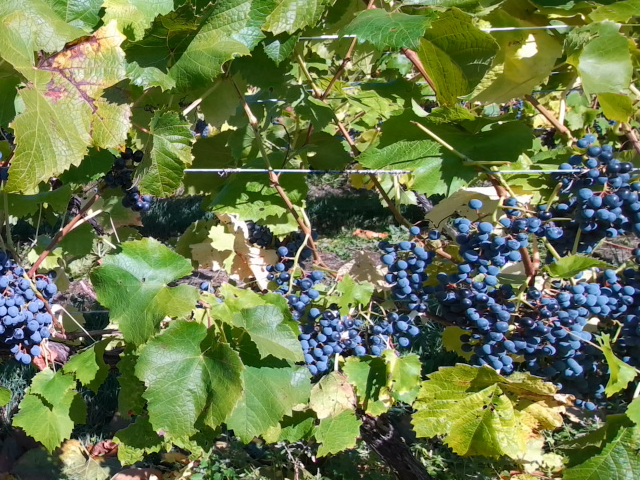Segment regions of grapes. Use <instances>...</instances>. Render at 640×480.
I'll use <instances>...</instances> for the list:
<instances>
[{"label":"grapes","instance_id":"obj_7","mask_svg":"<svg viewBox=\"0 0 640 480\" xmlns=\"http://www.w3.org/2000/svg\"><path fill=\"white\" fill-rule=\"evenodd\" d=\"M275 269L280 273V277L275 278V274L267 273L266 279L268 281H273L275 279L276 285H281L279 288L275 289V293H280L281 295H285L284 291H289V287L286 285V281L290 279V274L285 270V265L282 262H277L275 266L272 263H268L265 267L267 272H273Z\"/></svg>","mask_w":640,"mask_h":480},{"label":"grapes","instance_id":"obj_3","mask_svg":"<svg viewBox=\"0 0 640 480\" xmlns=\"http://www.w3.org/2000/svg\"><path fill=\"white\" fill-rule=\"evenodd\" d=\"M51 316L45 302L34 297L25 268L6 250L0 251V337L19 362L40 354L37 342L49 337Z\"/></svg>","mask_w":640,"mask_h":480},{"label":"grapes","instance_id":"obj_5","mask_svg":"<svg viewBox=\"0 0 640 480\" xmlns=\"http://www.w3.org/2000/svg\"><path fill=\"white\" fill-rule=\"evenodd\" d=\"M402 331H408L412 337H419L421 333V329L412 324L411 318L407 314L399 315L397 312H390L387 315V320H382L380 325L373 327V334L370 336V340L373 342L371 345L373 353L381 355L382 350L386 348V342L379 334L387 338L389 333H393L394 337L398 338V345L401 348H409L411 342L403 336Z\"/></svg>","mask_w":640,"mask_h":480},{"label":"grapes","instance_id":"obj_9","mask_svg":"<svg viewBox=\"0 0 640 480\" xmlns=\"http://www.w3.org/2000/svg\"><path fill=\"white\" fill-rule=\"evenodd\" d=\"M562 174H565V176L562 178L561 184L558 186V191L561 194H568L572 190V184L574 183V178L570 175L571 173L551 174V177L554 180H559L562 177Z\"/></svg>","mask_w":640,"mask_h":480},{"label":"grapes","instance_id":"obj_2","mask_svg":"<svg viewBox=\"0 0 640 480\" xmlns=\"http://www.w3.org/2000/svg\"><path fill=\"white\" fill-rule=\"evenodd\" d=\"M610 144L591 145L587 149L590 156L586 166L590 169L583 177L587 186L609 183L616 190L611 194L597 195L589 187H582L577 195L557 205L560 215L572 213L581 201L576 212V221L584 232L596 231L599 220L616 224L606 229L609 237L624 235L629 228L640 233V183H629L634 164L613 157Z\"/></svg>","mask_w":640,"mask_h":480},{"label":"grapes","instance_id":"obj_4","mask_svg":"<svg viewBox=\"0 0 640 480\" xmlns=\"http://www.w3.org/2000/svg\"><path fill=\"white\" fill-rule=\"evenodd\" d=\"M321 314L319 307L311 308L308 312L309 323L300 326L301 348L304 350V361L308 363L309 371L317 374L319 370H328V355L349 351L353 348L356 356H364L366 349L362 345V339L356 329L362 327V322L348 315L341 317L338 311L326 309L322 312L320 325L323 327L315 331L311 323Z\"/></svg>","mask_w":640,"mask_h":480},{"label":"grapes","instance_id":"obj_6","mask_svg":"<svg viewBox=\"0 0 640 480\" xmlns=\"http://www.w3.org/2000/svg\"><path fill=\"white\" fill-rule=\"evenodd\" d=\"M325 276V271L323 269H313L310 272V277H296L294 279V284L296 286H300L303 290H306L305 293H302L300 297L296 294H291L287 297V302L292 309V318L294 320H299L301 316L305 314V310L307 309V305L311 302V299H318L320 297V292L315 289L313 286L315 284H319L323 277Z\"/></svg>","mask_w":640,"mask_h":480},{"label":"grapes","instance_id":"obj_1","mask_svg":"<svg viewBox=\"0 0 640 480\" xmlns=\"http://www.w3.org/2000/svg\"><path fill=\"white\" fill-rule=\"evenodd\" d=\"M553 213L546 204L538 207L537 216L503 218L500 226L509 231H520L517 239L495 237L492 240L493 225L479 221L471 229L467 217H456L453 226L459 231L456 242L460 246L459 255L465 260L458 264L459 273L439 271L436 277L441 280L435 286L425 285L428 280L425 272L427 265L435 257L434 251L417 246L415 240H399L392 245L388 240L379 242V248L386 252L380 257L390 272L385 276L387 284H395L392 292L396 298L412 300L409 310L418 314L426 311L430 294H438L440 312L449 322H456L462 329H471V337L479 339L474 347L470 362L475 366L489 364L501 369L503 375L510 374L520 366L532 375H558L569 380L577 394L588 391L592 399H578L576 406L583 410L596 412L605 407L604 398L611 376L608 358L597 346H589L592 333L584 331L588 320L597 315L612 317L620 325L618 331V353L624 364L640 368V281L635 279L637 272L630 268L623 270L627 277L625 285L618 282V274L606 269L598 277L599 283H578L554 297L542 296L537 288H531L529 295L540 300L544 306L539 309L540 320L523 317L519 326L530 335L513 334L504 340V334L510 328V320L515 304L507 300L515 297L509 283L491 289L497 283V274L509 262H518L522 256L518 250L529 244L530 235L558 239L564 235V229L552 219ZM477 269L487 273L485 281H472V273ZM466 281L471 289L459 294L454 289L445 288L448 282ZM509 353L524 356L527 360L520 365L513 362Z\"/></svg>","mask_w":640,"mask_h":480},{"label":"grapes","instance_id":"obj_8","mask_svg":"<svg viewBox=\"0 0 640 480\" xmlns=\"http://www.w3.org/2000/svg\"><path fill=\"white\" fill-rule=\"evenodd\" d=\"M35 285L39 290H41V294L45 297L47 301H52L54 299V295L57 291V286L52 282L50 277L37 278L35 280Z\"/></svg>","mask_w":640,"mask_h":480}]
</instances>
